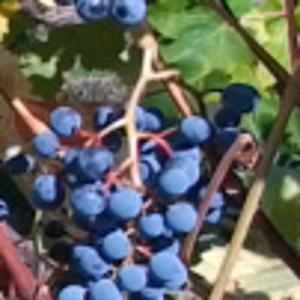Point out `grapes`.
<instances>
[{"label": "grapes", "instance_id": "01657485", "mask_svg": "<svg viewBox=\"0 0 300 300\" xmlns=\"http://www.w3.org/2000/svg\"><path fill=\"white\" fill-rule=\"evenodd\" d=\"M261 94L247 83H231L221 96L214 123L198 113L183 117L176 136L159 137L165 117L158 107L134 109L140 171L118 161V133L102 127L118 118L110 106L92 112L83 124L73 106L53 109V134H35L31 150L42 159H63L69 202L76 211L73 228L90 235L89 245L74 243L69 261L87 283H66L57 300H166V289L183 288L189 268L179 258V234L194 230L198 201L208 188L202 176V149L211 143L220 150L234 145L242 114L258 110Z\"/></svg>", "mask_w": 300, "mask_h": 300}, {"label": "grapes", "instance_id": "0513c4c2", "mask_svg": "<svg viewBox=\"0 0 300 300\" xmlns=\"http://www.w3.org/2000/svg\"><path fill=\"white\" fill-rule=\"evenodd\" d=\"M4 167L11 176L30 175L37 169V161L28 150L14 151L4 157Z\"/></svg>", "mask_w": 300, "mask_h": 300}, {"label": "grapes", "instance_id": "b958b902", "mask_svg": "<svg viewBox=\"0 0 300 300\" xmlns=\"http://www.w3.org/2000/svg\"><path fill=\"white\" fill-rule=\"evenodd\" d=\"M148 0H75L73 10L85 24L111 17L122 27L140 26L147 15Z\"/></svg>", "mask_w": 300, "mask_h": 300}, {"label": "grapes", "instance_id": "84f90ec7", "mask_svg": "<svg viewBox=\"0 0 300 300\" xmlns=\"http://www.w3.org/2000/svg\"><path fill=\"white\" fill-rule=\"evenodd\" d=\"M227 203V193L222 189H217L211 196L209 209L206 215V222L210 226L218 225L224 217Z\"/></svg>", "mask_w": 300, "mask_h": 300}]
</instances>
